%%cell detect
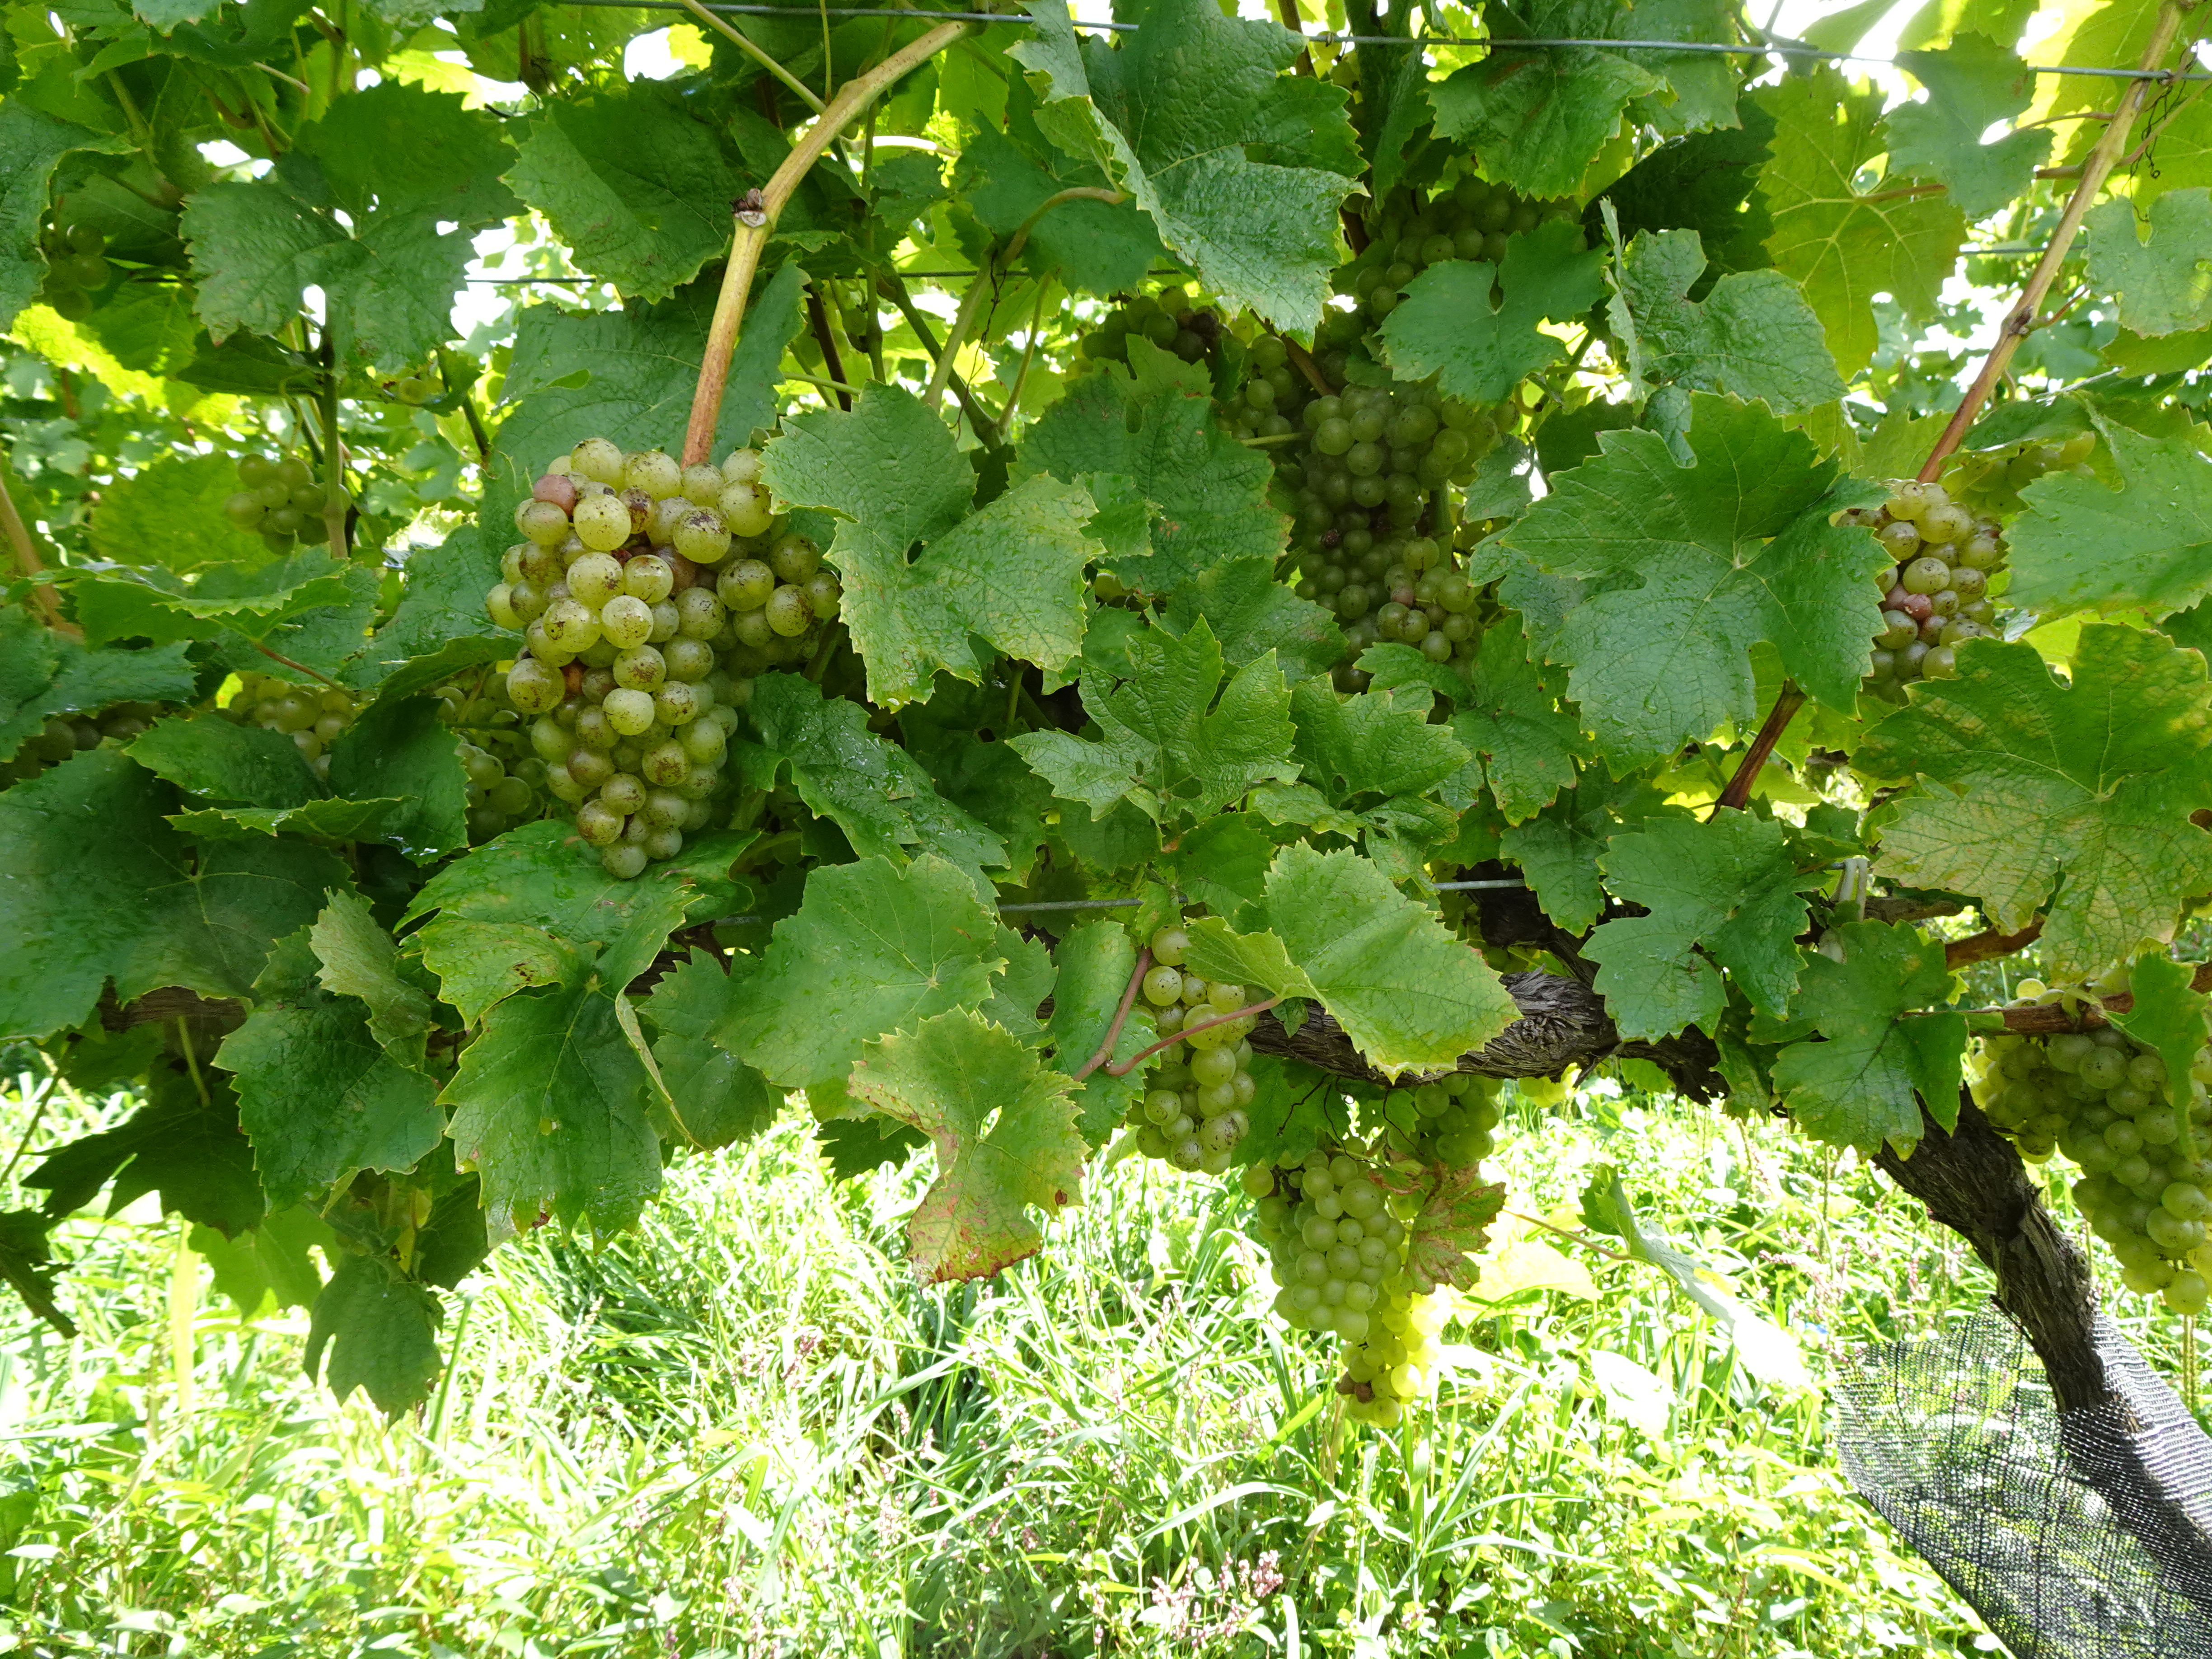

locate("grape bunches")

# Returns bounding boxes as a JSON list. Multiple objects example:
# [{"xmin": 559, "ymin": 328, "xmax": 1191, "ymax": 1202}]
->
[
  {"xmin": 1207, "ymin": 312, "xmax": 1367, "ymax": 488},
  {"xmin": 1835, "ymin": 479, "xmax": 2005, "ymax": 705},
  {"xmin": 431, "ymin": 672, "xmax": 550, "ymax": 847},
  {"xmin": 31, "ymin": 209, "xmax": 111, "ymax": 322},
  {"xmin": 1082, "ymin": 285, "xmax": 1253, "ymax": 397},
  {"xmin": 0, "ymin": 699, "xmax": 162, "ymax": 784},
  {"xmin": 1940, "ymin": 430, "xmax": 2095, "ymax": 517},
  {"xmin": 394, "ymin": 366, "xmax": 445, "ymax": 406},
  {"xmin": 227, "ymin": 454, "xmax": 351, "ymax": 555},
  {"xmin": 229, "ymin": 670, "xmax": 376, "ymax": 781},
  {"xmin": 1377, "ymin": 536, "xmax": 1486, "ymax": 724},
  {"xmin": 1125, "ymin": 924, "xmax": 1272, "ymax": 1175},
  {"xmin": 1968, "ymin": 978, "xmax": 2212, "ymax": 1314},
  {"xmin": 484, "ymin": 439, "xmax": 843, "ymax": 880},
  {"xmin": 1342, "ymin": 175, "xmax": 1582, "ymax": 326},
  {"xmin": 1294, "ymin": 366, "xmax": 1526, "ymax": 693},
  {"xmin": 131, "ymin": 1017, "xmax": 238, "ymax": 1108},
  {"xmin": 797, "ymin": 284, "xmax": 871, "ymax": 368},
  {"xmin": 1336, "ymin": 1220, "xmax": 1441, "ymax": 1428},
  {"xmin": 1239, "ymin": 1136, "xmax": 1405, "ymax": 1342},
  {"xmin": 1384, "ymin": 1072, "xmax": 1503, "ymax": 1219}
]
